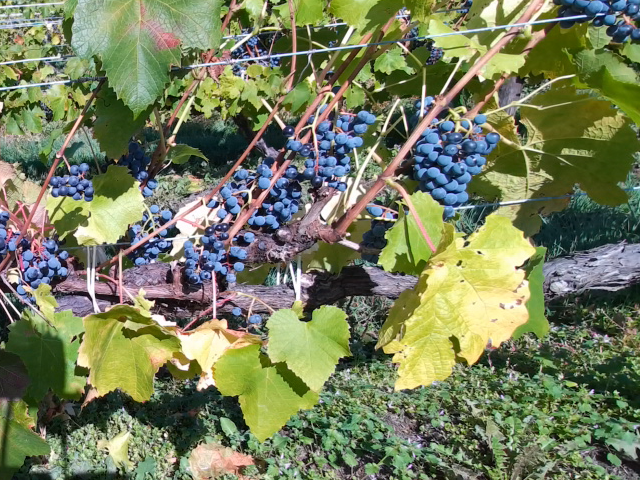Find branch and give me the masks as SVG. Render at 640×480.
<instances>
[{
    "label": "branch",
    "instance_id": "branch-1",
    "mask_svg": "<svg viewBox=\"0 0 640 480\" xmlns=\"http://www.w3.org/2000/svg\"><path fill=\"white\" fill-rule=\"evenodd\" d=\"M521 33V28H510L507 32L499 36L490 48L472 65L466 72L458 77V79L449 87L443 97L435 102L426 113L420 118L410 135L400 144L392 155V158L379 173L378 178L371 187L361 196V198L350 207L341 217H339L332 227V235L340 238L344 229L358 217L369 204L377 197L385 188L389 180L395 175L396 170L403 162V157L408 150L418 141L428 124L441 110L446 108L458 91L463 88L468 81L473 79L499 52V50L509 41L517 37Z\"/></svg>",
    "mask_w": 640,
    "mask_h": 480
},
{
    "label": "branch",
    "instance_id": "branch-3",
    "mask_svg": "<svg viewBox=\"0 0 640 480\" xmlns=\"http://www.w3.org/2000/svg\"><path fill=\"white\" fill-rule=\"evenodd\" d=\"M105 83V79L103 80H99L98 85L95 87V89L93 90V92L90 94V96L88 97L85 106L82 110V112L80 113V115L78 116L75 124L73 125L72 129L70 130L68 136L66 137L63 145L60 147V149L58 150L55 160L52 164V168L47 176V179L45 180L41 190L39 191V194L37 196V199L35 200L33 206L30 209V212L28 214V217L23 225V227L20 230V237L24 238L25 237V232L28 229V227L31 224V221L34 217V214L36 212V209L38 208V206L40 205V203L42 202V199L44 197V194L49 186V184L51 183L53 176L55 175V172L57 170L58 164L60 162V159L62 157V154L64 153V151L67 149L69 143L71 142L72 138L74 137V134L76 133V131L78 130L82 120L85 118V115L87 114L94 98L97 96V94L99 93V91L103 88V85Z\"/></svg>",
    "mask_w": 640,
    "mask_h": 480
},
{
    "label": "branch",
    "instance_id": "branch-14",
    "mask_svg": "<svg viewBox=\"0 0 640 480\" xmlns=\"http://www.w3.org/2000/svg\"><path fill=\"white\" fill-rule=\"evenodd\" d=\"M11 257H12V253H11V252H8V253L6 254V256H5L4 260H3V262H2V263H1V265H0V271H3V270H4V268L7 266V264H8V262H9V260L11 259Z\"/></svg>",
    "mask_w": 640,
    "mask_h": 480
},
{
    "label": "branch",
    "instance_id": "branch-6",
    "mask_svg": "<svg viewBox=\"0 0 640 480\" xmlns=\"http://www.w3.org/2000/svg\"><path fill=\"white\" fill-rule=\"evenodd\" d=\"M205 69H206V66H201L198 69V71L194 75V78L191 80V82L189 83L188 87L185 89L184 93L179 96L178 101L176 103L175 110H174L171 118L169 119L167 125L165 126V130H164L162 139L160 140V143H159L158 147L156 148L154 155L152 156L150 164L147 167V172L148 173L152 172L153 167L155 166V163L157 161V158L159 157L160 152L163 149V147L165 145V142L167 141V138H168L169 133H170V129H171L172 125L174 124V121L176 120V118H177V116H178V114L180 112L183 100L186 99L189 96V93L192 91L193 87L195 86V84L197 83V81L199 80L201 74L203 73V71Z\"/></svg>",
    "mask_w": 640,
    "mask_h": 480
},
{
    "label": "branch",
    "instance_id": "branch-5",
    "mask_svg": "<svg viewBox=\"0 0 640 480\" xmlns=\"http://www.w3.org/2000/svg\"><path fill=\"white\" fill-rule=\"evenodd\" d=\"M359 52V48L358 49H353L351 50L346 58L344 59V61L339 65V67L336 69L335 73L333 74V76L327 81V83L318 90L319 94H316L310 104V106L307 108L306 112L304 113V115L301 117V119L296 123L295 127H294V131L296 133H299L301 131V129L303 128V126L308 122V120L310 119V117L312 116V114L314 113V111L316 110L317 106L319 105V102L321 100V96L320 95H325L332 87L333 85L338 81V79L342 76V73L344 72V70L349 66V64L353 61L354 57L356 56V54Z\"/></svg>",
    "mask_w": 640,
    "mask_h": 480
},
{
    "label": "branch",
    "instance_id": "branch-11",
    "mask_svg": "<svg viewBox=\"0 0 640 480\" xmlns=\"http://www.w3.org/2000/svg\"><path fill=\"white\" fill-rule=\"evenodd\" d=\"M288 2V12H289V26H290V32H291V37H292V51L297 50L298 48V42H297V35H296V29H295V24H294V9H293V0H287Z\"/></svg>",
    "mask_w": 640,
    "mask_h": 480
},
{
    "label": "branch",
    "instance_id": "branch-13",
    "mask_svg": "<svg viewBox=\"0 0 640 480\" xmlns=\"http://www.w3.org/2000/svg\"><path fill=\"white\" fill-rule=\"evenodd\" d=\"M235 5H236V1L232 0L230 2L229 10L225 14V17H224V19H223V21L221 23V26H220V30L221 31H224L226 29V25L228 24V21H229L231 15L235 12Z\"/></svg>",
    "mask_w": 640,
    "mask_h": 480
},
{
    "label": "branch",
    "instance_id": "branch-2",
    "mask_svg": "<svg viewBox=\"0 0 640 480\" xmlns=\"http://www.w3.org/2000/svg\"><path fill=\"white\" fill-rule=\"evenodd\" d=\"M296 77V57L292 56L291 57V74L288 80V83L285 85V87L283 88V90L281 91L275 106L271 109V111L269 112L265 122L263 123L261 129L252 137L250 144L248 145V147L245 149V151L243 152L242 156L239 157L237 159V162L225 173V175L220 179L219 183L215 184L214 187L212 188V190L209 192V195L206 198H203L201 200H198L191 208L181 211L180 213H178L174 218H172L170 221H168L167 223H165L163 226L158 227L157 229H155L153 232H151L149 235H147L144 239H142L140 242L132 245V246H128L126 249H124L123 251L117 253L116 255H114L113 257L109 258L107 261L101 263L99 266L96 267L97 271H101L103 270L105 267L111 265L112 263H114L115 261L119 260L120 258L124 257L125 255H127L128 253H130L131 251L137 250L138 248L142 247L143 245H145L146 243H148L150 240H152L155 236H157L159 233L167 230L169 227H171L172 225H174L180 218L189 215L193 212H195L197 210L198 207H200L201 205H204L208 202H210L214 197H215V193L218 191V189L224 185V183L227 181V179L233 174V172H235L240 165L242 164V162L247 158V156L249 155L250 151L254 148L257 140L259 139L260 136L263 135V133L266 131L268 125L270 124L272 118L274 117L275 113L277 112V110L280 108L281 103L283 102V99L286 95V93L289 91V89L291 88V86L293 85L294 79Z\"/></svg>",
    "mask_w": 640,
    "mask_h": 480
},
{
    "label": "branch",
    "instance_id": "branch-12",
    "mask_svg": "<svg viewBox=\"0 0 640 480\" xmlns=\"http://www.w3.org/2000/svg\"><path fill=\"white\" fill-rule=\"evenodd\" d=\"M394 23H395V18L393 16H390L386 24L384 25V27L374 36L373 42L375 43L381 40L383 36L390 31Z\"/></svg>",
    "mask_w": 640,
    "mask_h": 480
},
{
    "label": "branch",
    "instance_id": "branch-8",
    "mask_svg": "<svg viewBox=\"0 0 640 480\" xmlns=\"http://www.w3.org/2000/svg\"><path fill=\"white\" fill-rule=\"evenodd\" d=\"M508 78V75L506 73H502L496 81H494L493 83H491L486 89L485 92L483 93V96L481 97V101H479L472 109L468 110L464 115L463 118L465 120H469L471 117H473L474 115H476L484 106L485 104L488 102L490 95L492 94V92L494 90H496L497 88H499L502 83Z\"/></svg>",
    "mask_w": 640,
    "mask_h": 480
},
{
    "label": "branch",
    "instance_id": "branch-7",
    "mask_svg": "<svg viewBox=\"0 0 640 480\" xmlns=\"http://www.w3.org/2000/svg\"><path fill=\"white\" fill-rule=\"evenodd\" d=\"M375 54V48H368L362 58L359 60L357 66L351 71V73L346 78L343 85H341L336 93L333 95L331 101L329 102L328 107L320 114L319 118L316 120L315 125H318L322 119H326L330 113L335 109L336 104L339 102V99L342 97L344 92L350 88L355 77L360 73V71L364 68L366 63L369 61L371 56Z\"/></svg>",
    "mask_w": 640,
    "mask_h": 480
},
{
    "label": "branch",
    "instance_id": "branch-9",
    "mask_svg": "<svg viewBox=\"0 0 640 480\" xmlns=\"http://www.w3.org/2000/svg\"><path fill=\"white\" fill-rule=\"evenodd\" d=\"M554 28V24L553 23H548L544 29H542L540 32H537L535 34L534 37H532L523 47V50L520 52V55L522 57H526L528 55V53L530 52V49L537 43L539 42L542 38H544L546 35H548L551 30Z\"/></svg>",
    "mask_w": 640,
    "mask_h": 480
},
{
    "label": "branch",
    "instance_id": "branch-4",
    "mask_svg": "<svg viewBox=\"0 0 640 480\" xmlns=\"http://www.w3.org/2000/svg\"><path fill=\"white\" fill-rule=\"evenodd\" d=\"M297 157V153L292 151L283 161V163L279 166L276 172L270 179V186L268 188L262 189L259 193V196L254 200V202L250 205L247 211L240 217V219L229 229V234L234 236L236 232L247 222V220L252 216L255 210L259 207V205L266 199L268 193H270L273 188L276 186L278 179L284 173L286 168L291 164V162Z\"/></svg>",
    "mask_w": 640,
    "mask_h": 480
},
{
    "label": "branch",
    "instance_id": "branch-10",
    "mask_svg": "<svg viewBox=\"0 0 640 480\" xmlns=\"http://www.w3.org/2000/svg\"><path fill=\"white\" fill-rule=\"evenodd\" d=\"M543 7H544L543 0L534 1L527 8H525L523 12L520 14V20L522 22L528 21L531 18V16H533L537 11L541 10Z\"/></svg>",
    "mask_w": 640,
    "mask_h": 480
}]
</instances>
